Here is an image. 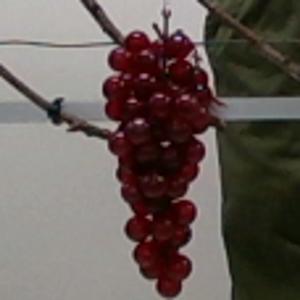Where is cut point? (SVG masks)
<instances>
[{"label": "cut point", "mask_w": 300, "mask_h": 300, "mask_svg": "<svg viewBox=\"0 0 300 300\" xmlns=\"http://www.w3.org/2000/svg\"><path fill=\"white\" fill-rule=\"evenodd\" d=\"M159 15L163 20V37L169 38V24L173 17V10L171 7V0H161V7Z\"/></svg>", "instance_id": "obj_1"}]
</instances>
